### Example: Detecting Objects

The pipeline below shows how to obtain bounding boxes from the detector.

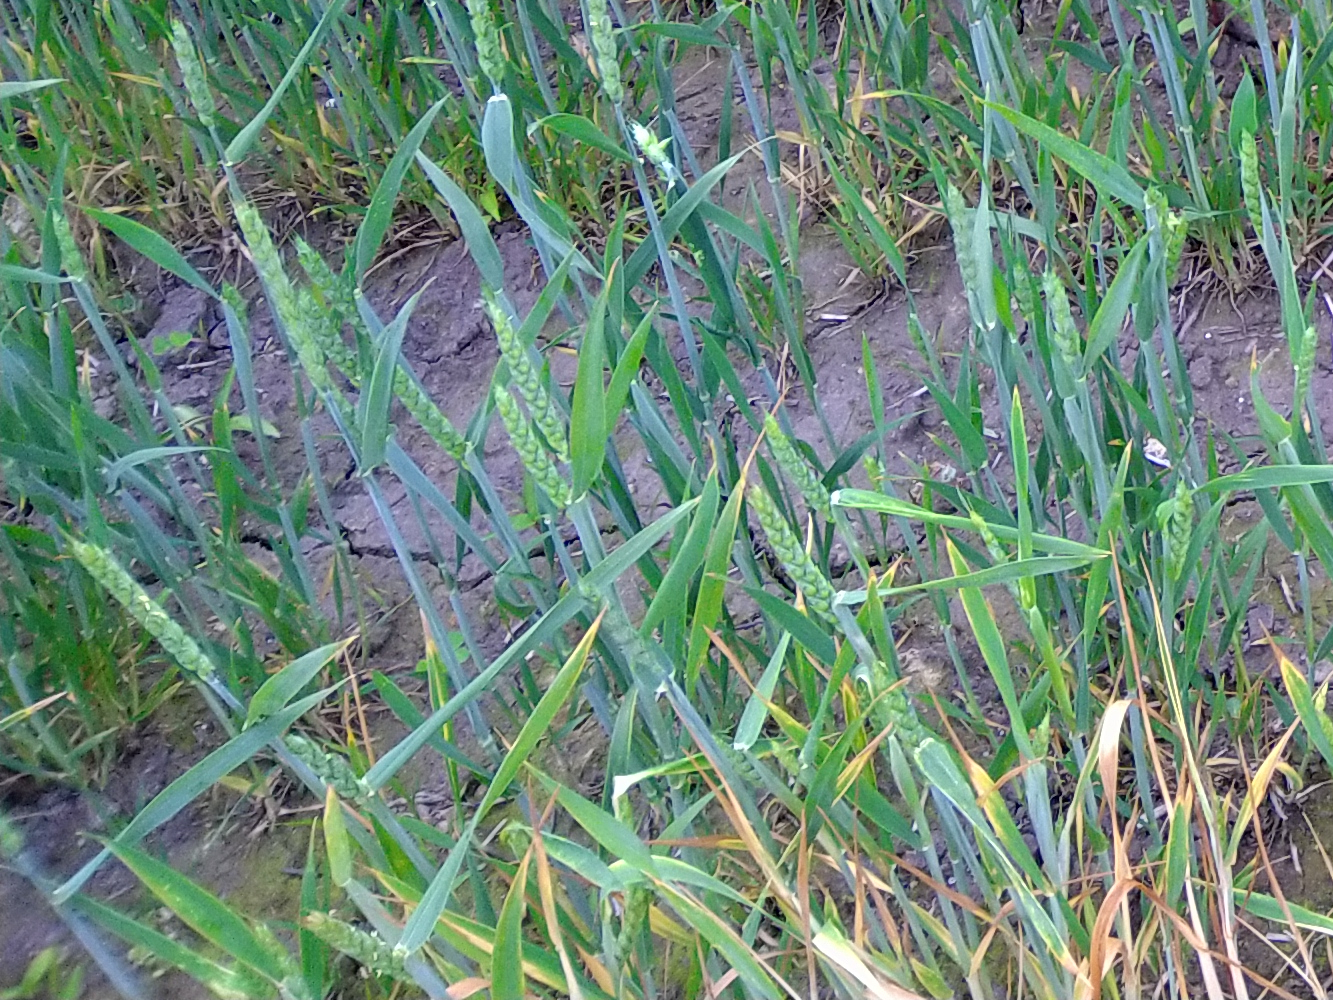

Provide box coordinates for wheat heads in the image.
[875,665,925,766]
[54,212,85,280]
[391,362,467,462]
[1012,258,1034,320]
[494,389,570,507]
[67,544,216,678]
[1169,482,1195,577]
[170,21,214,123]
[1242,131,1263,236]
[969,513,1020,608]
[306,912,410,977]
[232,207,326,389]
[254,926,325,1000]
[747,487,840,631]
[293,240,367,331]
[1165,216,1187,283]
[763,413,833,520]
[488,304,568,456]
[281,297,354,425]
[634,124,665,168]
[947,185,976,292]
[578,581,665,683]
[452,0,506,79]
[1047,272,1081,368]
[1298,327,1316,408]
[618,886,648,958]
[285,736,369,807]
[583,0,622,100]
